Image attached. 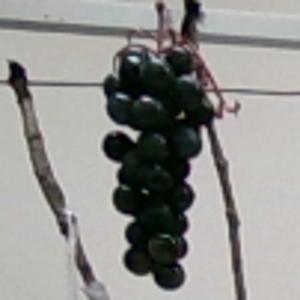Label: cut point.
I'll use <instances>...</instances> for the list:
<instances>
[{
	"label": "cut point",
	"mask_w": 300,
	"mask_h": 300,
	"mask_svg": "<svg viewBox=\"0 0 300 300\" xmlns=\"http://www.w3.org/2000/svg\"><path fill=\"white\" fill-rule=\"evenodd\" d=\"M167 8L165 0H154L152 10L155 13L157 21V58L162 57V32L164 25V11Z\"/></svg>",
	"instance_id": "obj_1"
}]
</instances>
